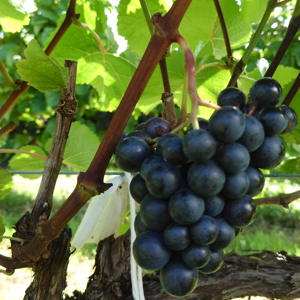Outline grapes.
Masks as SVG:
<instances>
[{
  "mask_svg": "<svg viewBox=\"0 0 300 300\" xmlns=\"http://www.w3.org/2000/svg\"><path fill=\"white\" fill-rule=\"evenodd\" d=\"M282 96L281 84L264 77L246 95L235 86L223 88L218 109L208 119H191L183 137L161 117L122 133L116 164L138 173L129 184L140 205L133 257L143 270L160 268L168 295L188 296L198 286L199 272H217L236 228L255 220L253 197L264 186L260 169L283 161L279 135L291 133L298 123L291 106L277 105Z\"/></svg>",
  "mask_w": 300,
  "mask_h": 300,
  "instance_id": "1",
  "label": "grapes"
}]
</instances>
